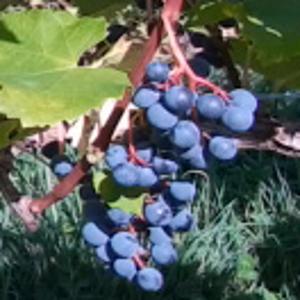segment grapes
<instances>
[{
	"label": "grapes",
	"instance_id": "0513c4c2",
	"mask_svg": "<svg viewBox=\"0 0 300 300\" xmlns=\"http://www.w3.org/2000/svg\"><path fill=\"white\" fill-rule=\"evenodd\" d=\"M189 42L193 47L203 50L196 55V58H191L188 61V67L193 73L206 77L210 73V65L214 68H219L222 65L220 53L203 33L192 31L189 34Z\"/></svg>",
	"mask_w": 300,
	"mask_h": 300
},
{
	"label": "grapes",
	"instance_id": "b958b902",
	"mask_svg": "<svg viewBox=\"0 0 300 300\" xmlns=\"http://www.w3.org/2000/svg\"><path fill=\"white\" fill-rule=\"evenodd\" d=\"M195 195L190 181H172L162 195L145 207V219L134 212L108 208L99 193L89 184L80 189L86 201L81 226L82 240L97 248L99 260L107 272L122 281L137 283L148 294L158 293L164 286L160 269L173 268L177 252L169 241L171 233H189L195 227V217L180 207Z\"/></svg>",
	"mask_w": 300,
	"mask_h": 300
},
{
	"label": "grapes",
	"instance_id": "01657485",
	"mask_svg": "<svg viewBox=\"0 0 300 300\" xmlns=\"http://www.w3.org/2000/svg\"><path fill=\"white\" fill-rule=\"evenodd\" d=\"M131 96L132 104L143 110L144 121L168 133L167 144L179 152V161L189 172H207L214 160L233 162L239 156V146L229 136L212 133L205 139L203 129L189 118L193 111L204 120L221 118L231 132L248 133L258 110L257 95L249 88L211 90L163 61L146 66L143 85ZM106 163L120 189L155 190L161 175H174L180 168L172 154L158 153L150 140H141L136 147L111 145Z\"/></svg>",
	"mask_w": 300,
	"mask_h": 300
},
{
	"label": "grapes",
	"instance_id": "84f90ec7",
	"mask_svg": "<svg viewBox=\"0 0 300 300\" xmlns=\"http://www.w3.org/2000/svg\"><path fill=\"white\" fill-rule=\"evenodd\" d=\"M39 154L46 159H51V168L58 176H67L74 169L71 159L61 155L60 143L57 140H48L39 147Z\"/></svg>",
	"mask_w": 300,
	"mask_h": 300
}]
</instances>
